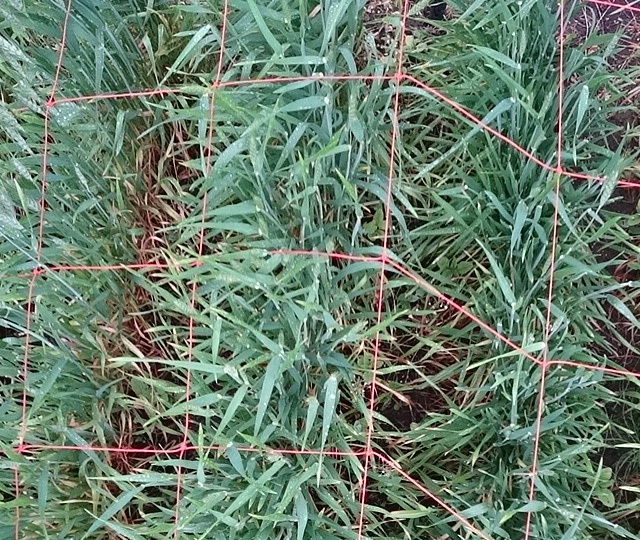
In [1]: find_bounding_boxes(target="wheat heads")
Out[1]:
[23,195,46,210]
[76,162,87,186]
[536,254,554,274]
[16,158,35,182]
[519,27,530,54]
[598,167,619,207]
[1,214,22,230]
[2,194,18,224]
[540,90,553,114]
[312,165,323,183]
[17,96,41,114]
[227,258,245,276]
[7,127,30,152]
[173,296,193,316]
[2,12,26,35]
[247,137,258,163]
[1,109,25,135]
[252,248,265,256]
[178,83,209,97]
[0,42,33,64]
[348,93,358,124]
[213,273,237,284]
[51,235,69,248]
